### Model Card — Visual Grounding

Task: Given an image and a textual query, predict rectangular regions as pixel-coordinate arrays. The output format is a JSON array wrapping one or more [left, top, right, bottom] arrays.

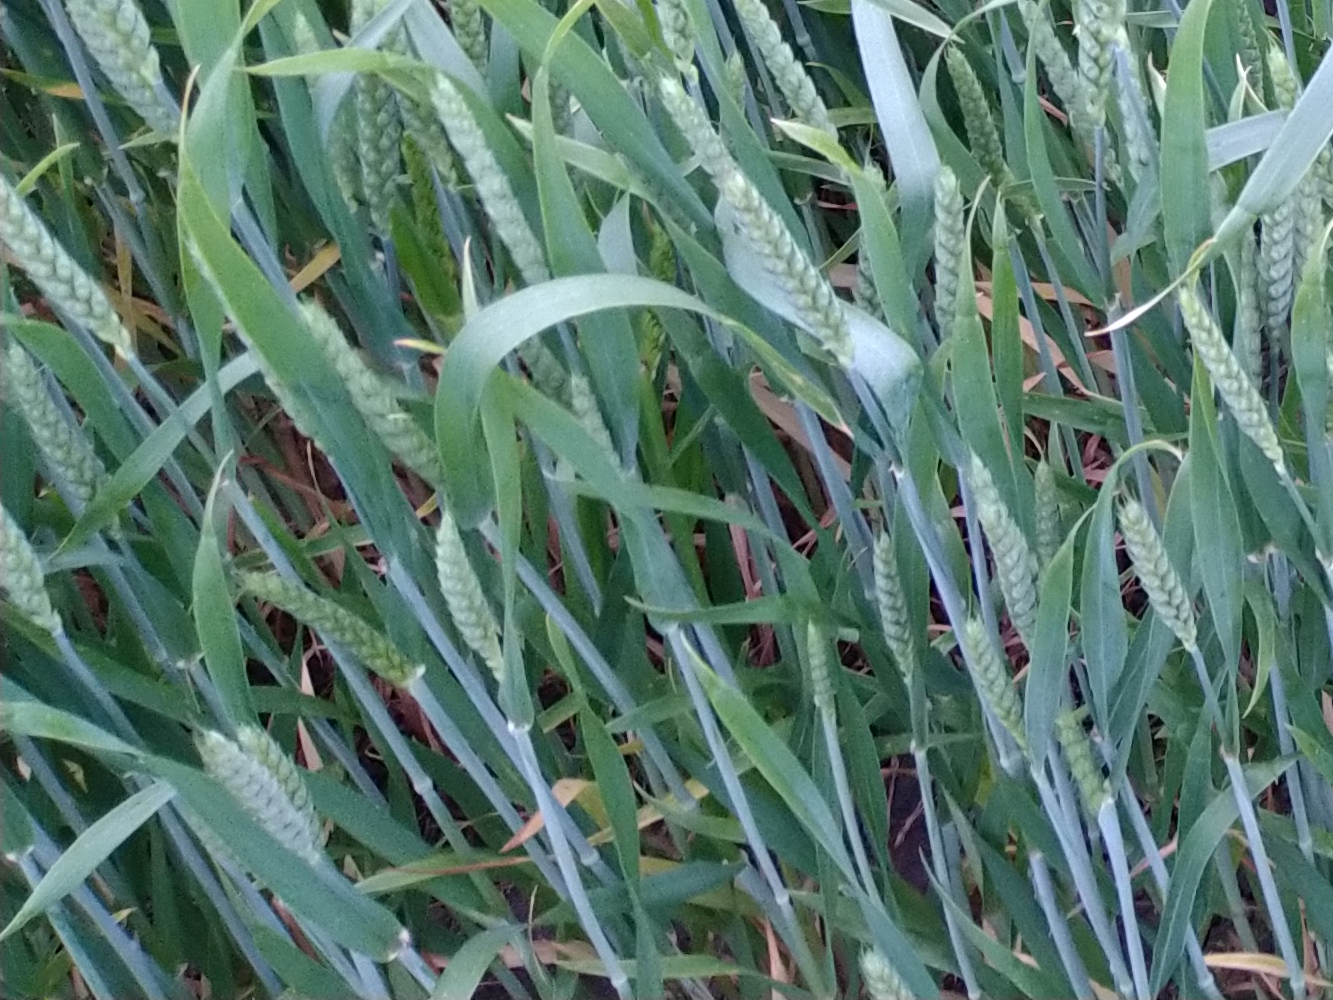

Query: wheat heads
[[854, 179, 890, 319], [235, 722, 328, 844], [970, 456, 1037, 647], [571, 373, 621, 466], [1260, 198, 1295, 339], [727, 0, 832, 140], [431, 81, 553, 285], [433, 514, 504, 677], [442, 0, 490, 77], [549, 72, 573, 133], [1118, 503, 1196, 644], [1034, 463, 1059, 566], [1017, 0, 1102, 160], [330, 100, 362, 206], [1070, 0, 1114, 121], [1233, 231, 1261, 379], [1228, 0, 1265, 103], [353, 0, 400, 225], [962, 621, 1028, 746], [1179, 292, 1285, 473], [660, 80, 740, 185], [54, 0, 181, 139], [196, 732, 316, 856], [1117, 51, 1154, 178], [945, 45, 1005, 181], [294, 13, 322, 90], [1267, 56, 1333, 234], [935, 168, 965, 342], [0, 502, 58, 632], [0, 0, 163, 82], [861, 952, 924, 999], [297, 303, 445, 483], [1058, 710, 1106, 814], [7, 349, 110, 516], [193, 248, 323, 450], [1, 179, 128, 346], [725, 181, 853, 362], [234, 571, 418, 681], [1295, 162, 1324, 276], [634, 0, 698, 87], [375, 0, 457, 175], [808, 621, 834, 707], [873, 533, 913, 674], [519, 336, 574, 409]]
